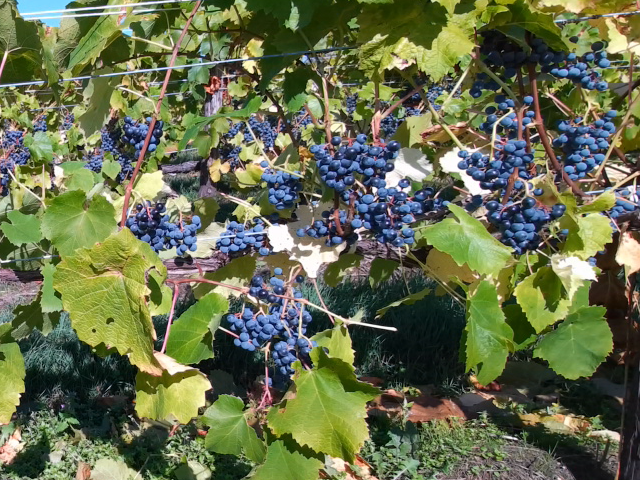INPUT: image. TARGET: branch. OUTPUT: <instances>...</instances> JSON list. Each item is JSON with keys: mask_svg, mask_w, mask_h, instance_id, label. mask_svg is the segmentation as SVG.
<instances>
[{"mask_svg": "<svg viewBox=\"0 0 640 480\" xmlns=\"http://www.w3.org/2000/svg\"><path fill=\"white\" fill-rule=\"evenodd\" d=\"M527 68L530 73V79L532 83V88L530 89V92L533 95V111H534L535 127L537 128V133L542 137V146L546 153V157L551 163L555 173L566 183V185L572 190L574 194H576L581 198L589 199L591 195H585L584 191L576 186L573 180L561 169L558 161L556 160L553 154V151L549 144V135L544 130V125L542 124V119H541L540 95L538 92L539 81H538L537 71L533 63H529L527 65Z\"/></svg>", "mask_w": 640, "mask_h": 480, "instance_id": "obj_1", "label": "branch"}, {"mask_svg": "<svg viewBox=\"0 0 640 480\" xmlns=\"http://www.w3.org/2000/svg\"><path fill=\"white\" fill-rule=\"evenodd\" d=\"M173 73L172 71H167L166 75H165V79L162 83L161 86V92L159 95V99L158 102L156 104V107L152 113V118L151 121L149 122V125L147 126V131H146V135H145V140L143 142V146L141 148L140 151V156L139 159L134 167V171L130 177L128 186L126 187V195H125V205H124V209H123V214H122V218H121V225L125 226L126 225V220H127V216H128V211H129V207H130V197H131V190L133 189L135 180L137 178V175L139 173V169L141 168V165L145 159V154H146V150L148 148V144L150 142V137H151V133H152V129L154 127V124L156 123L157 120V115L162 107L164 98H165V94H166V88L169 84L171 75Z\"/></svg>", "mask_w": 640, "mask_h": 480, "instance_id": "obj_2", "label": "branch"}, {"mask_svg": "<svg viewBox=\"0 0 640 480\" xmlns=\"http://www.w3.org/2000/svg\"><path fill=\"white\" fill-rule=\"evenodd\" d=\"M202 2H203V0H197L196 5H195L194 9L192 10L191 15L189 16L186 25L180 31V34H179V37L177 38L176 46H175L173 52H144V53L134 54V55H131V56L125 58V59L110 63V66H115L117 64H122V63L130 61L131 59H134L136 57L147 56V55H171L170 60H169V65H174V62L176 60V56L177 55H191V56L201 57V58H204L206 60H209V57L206 56V55H203V54H198V53H193V52H179V50L181 49V44H182V41L184 39V36H185L187 30L191 27L194 18L196 17L197 13L199 12L200 7L202 5Z\"/></svg>", "mask_w": 640, "mask_h": 480, "instance_id": "obj_3", "label": "branch"}, {"mask_svg": "<svg viewBox=\"0 0 640 480\" xmlns=\"http://www.w3.org/2000/svg\"><path fill=\"white\" fill-rule=\"evenodd\" d=\"M277 297H283L284 300H288L297 304H304L307 307H309L310 309L317 311L318 313H324L327 314L328 316H331L337 320H339L340 322L355 326V327H360V328H372V329H378V330H383V331H393V332H398L399 328L396 326H385V325H380V324H374V323H362V322H358V321H354L345 317H342L341 315L326 309V308H320L319 306H316L314 304H312L311 302H309L306 299H299L296 297H293L291 295H276Z\"/></svg>", "mask_w": 640, "mask_h": 480, "instance_id": "obj_4", "label": "branch"}, {"mask_svg": "<svg viewBox=\"0 0 640 480\" xmlns=\"http://www.w3.org/2000/svg\"><path fill=\"white\" fill-rule=\"evenodd\" d=\"M477 66L480 68L481 71H483L485 74H487L489 77H491L495 82H497L504 89H506V91L509 94V96L511 97L512 101L515 103L514 109H515L516 115L518 116V139L522 140L523 139V106H522L521 101L514 94L512 88H511V86L509 84L504 82L501 78H499L495 73H493L491 70H489L481 62H478Z\"/></svg>", "mask_w": 640, "mask_h": 480, "instance_id": "obj_5", "label": "branch"}, {"mask_svg": "<svg viewBox=\"0 0 640 480\" xmlns=\"http://www.w3.org/2000/svg\"><path fill=\"white\" fill-rule=\"evenodd\" d=\"M187 282H205L213 285H218L219 287L229 289L234 292H242L244 294L248 293V289L245 287H237L228 283L221 282L220 280H215L207 277H185L179 280L167 279L166 283L170 285H181Z\"/></svg>", "mask_w": 640, "mask_h": 480, "instance_id": "obj_6", "label": "branch"}, {"mask_svg": "<svg viewBox=\"0 0 640 480\" xmlns=\"http://www.w3.org/2000/svg\"><path fill=\"white\" fill-rule=\"evenodd\" d=\"M321 84H322V99H323L324 111H325V125H326V131H327V146H328L329 152L331 154H334L335 150H334L333 143H332V128H331V122H330V108H329V102H328V97H327V82H326V77L325 76L321 77Z\"/></svg>", "mask_w": 640, "mask_h": 480, "instance_id": "obj_7", "label": "branch"}, {"mask_svg": "<svg viewBox=\"0 0 640 480\" xmlns=\"http://www.w3.org/2000/svg\"><path fill=\"white\" fill-rule=\"evenodd\" d=\"M380 92H381V80H375V108H374V129H375V137H380V126H379V110H380Z\"/></svg>", "mask_w": 640, "mask_h": 480, "instance_id": "obj_8", "label": "branch"}, {"mask_svg": "<svg viewBox=\"0 0 640 480\" xmlns=\"http://www.w3.org/2000/svg\"><path fill=\"white\" fill-rule=\"evenodd\" d=\"M265 95L269 98V100L272 102V104H274V106L277 108V111H278V113H279V116H280V118L282 119V121H283V123H284V125H285V127H286V129H287V131H288V133H289V136H290L291 142L293 143V146H294L295 150H296V151H299V147L297 146L296 140L294 139V136H293L292 130H291V128H290V126H289V124H288L287 120L285 119V116L283 115L282 110H281V108H280L279 104H278V103H277V102L272 98V96L270 95V93L268 92V90H265Z\"/></svg>", "mask_w": 640, "mask_h": 480, "instance_id": "obj_9", "label": "branch"}, {"mask_svg": "<svg viewBox=\"0 0 640 480\" xmlns=\"http://www.w3.org/2000/svg\"><path fill=\"white\" fill-rule=\"evenodd\" d=\"M334 195V222L337 226V232L341 235H344L346 232L340 228L339 226V211H340V194L338 191L333 192Z\"/></svg>", "mask_w": 640, "mask_h": 480, "instance_id": "obj_10", "label": "branch"}, {"mask_svg": "<svg viewBox=\"0 0 640 480\" xmlns=\"http://www.w3.org/2000/svg\"><path fill=\"white\" fill-rule=\"evenodd\" d=\"M519 174V167L515 166L514 167V171L513 174L511 175V177L507 180V184H508V189L506 191V196L505 197H501V205L505 206L506 205V199L507 197L510 196L512 188L517 180V176Z\"/></svg>", "mask_w": 640, "mask_h": 480, "instance_id": "obj_11", "label": "branch"}, {"mask_svg": "<svg viewBox=\"0 0 640 480\" xmlns=\"http://www.w3.org/2000/svg\"><path fill=\"white\" fill-rule=\"evenodd\" d=\"M516 71H517V74H518L519 86H520L519 97L523 98L525 96V84H524V76H523L522 68H521L520 65L516 66Z\"/></svg>", "mask_w": 640, "mask_h": 480, "instance_id": "obj_12", "label": "branch"}, {"mask_svg": "<svg viewBox=\"0 0 640 480\" xmlns=\"http://www.w3.org/2000/svg\"><path fill=\"white\" fill-rule=\"evenodd\" d=\"M226 66L233 67V68L239 70L240 72L245 73L248 76H250L251 78L255 79L256 82H259V78L257 76H255L254 74L250 73V71L242 69L241 67L237 66L236 64H231V65H226Z\"/></svg>", "mask_w": 640, "mask_h": 480, "instance_id": "obj_13", "label": "branch"}]
</instances>
